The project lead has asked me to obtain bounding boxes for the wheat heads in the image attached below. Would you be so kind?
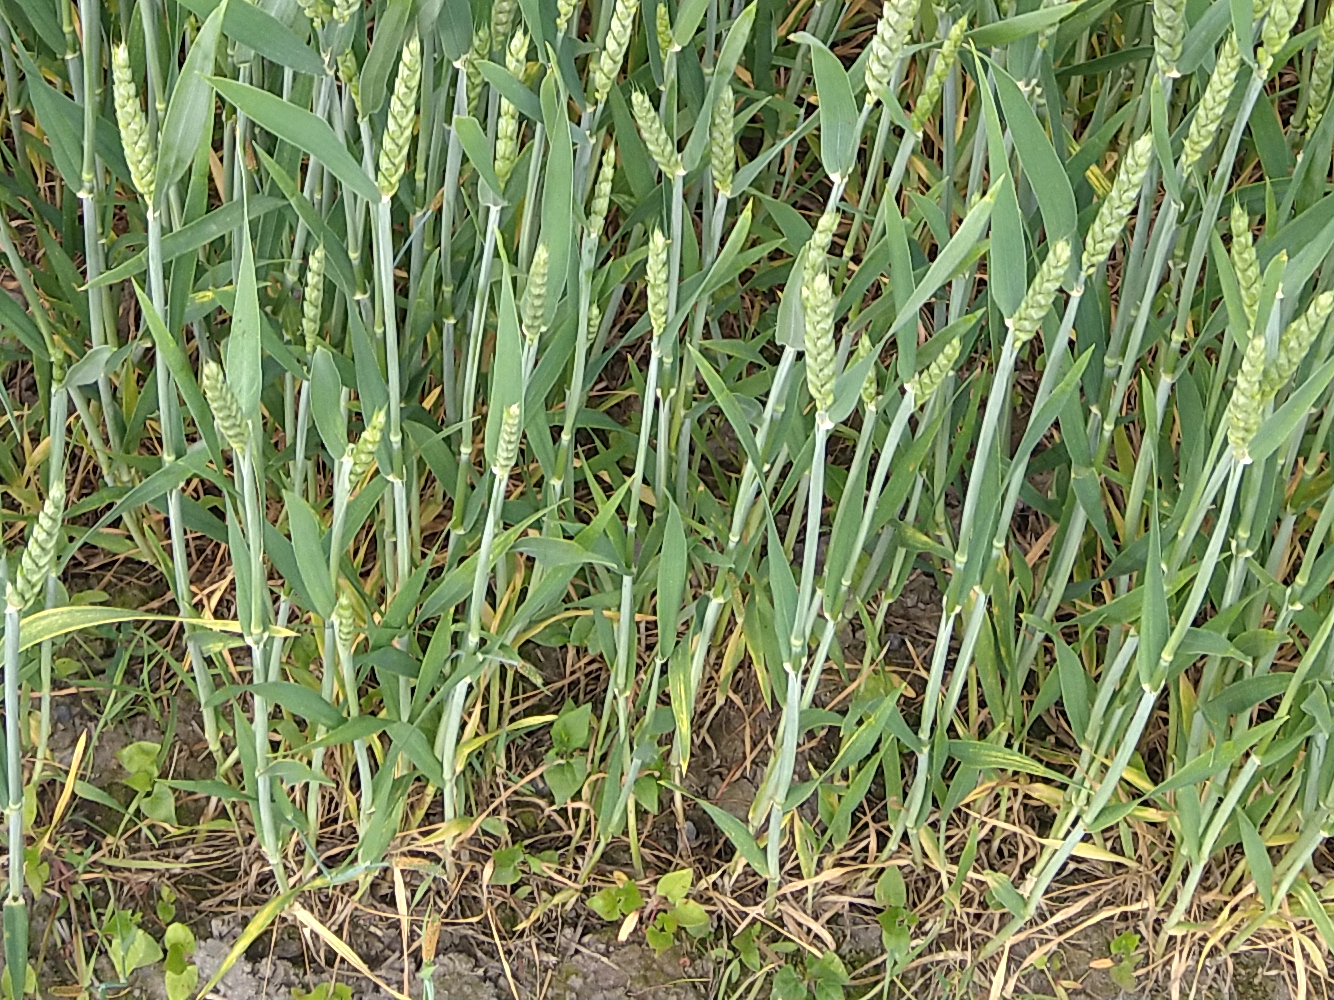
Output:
[349,411,387,487]
[586,306,602,348]
[919,13,970,119]
[908,339,963,411]
[632,94,680,177]
[587,146,615,250]
[1182,29,1246,166]
[1268,292,1334,396]
[201,359,244,449]
[1306,12,1334,130]
[489,0,521,46]
[805,269,835,409]
[1154,0,1188,74]
[378,35,422,200]
[1231,200,1258,331]
[459,24,489,112]
[596,0,640,103]
[334,594,356,648]
[863,336,876,399]
[525,250,552,330]
[655,4,671,60]
[643,233,671,336]
[11,480,69,616]
[332,0,394,34]
[1225,340,1268,451]
[804,212,841,284]
[496,35,533,188]
[709,85,735,190]
[1079,134,1152,278]
[303,242,325,348]
[495,406,522,471]
[112,44,157,200]
[869,0,935,88]
[1012,236,1072,336]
